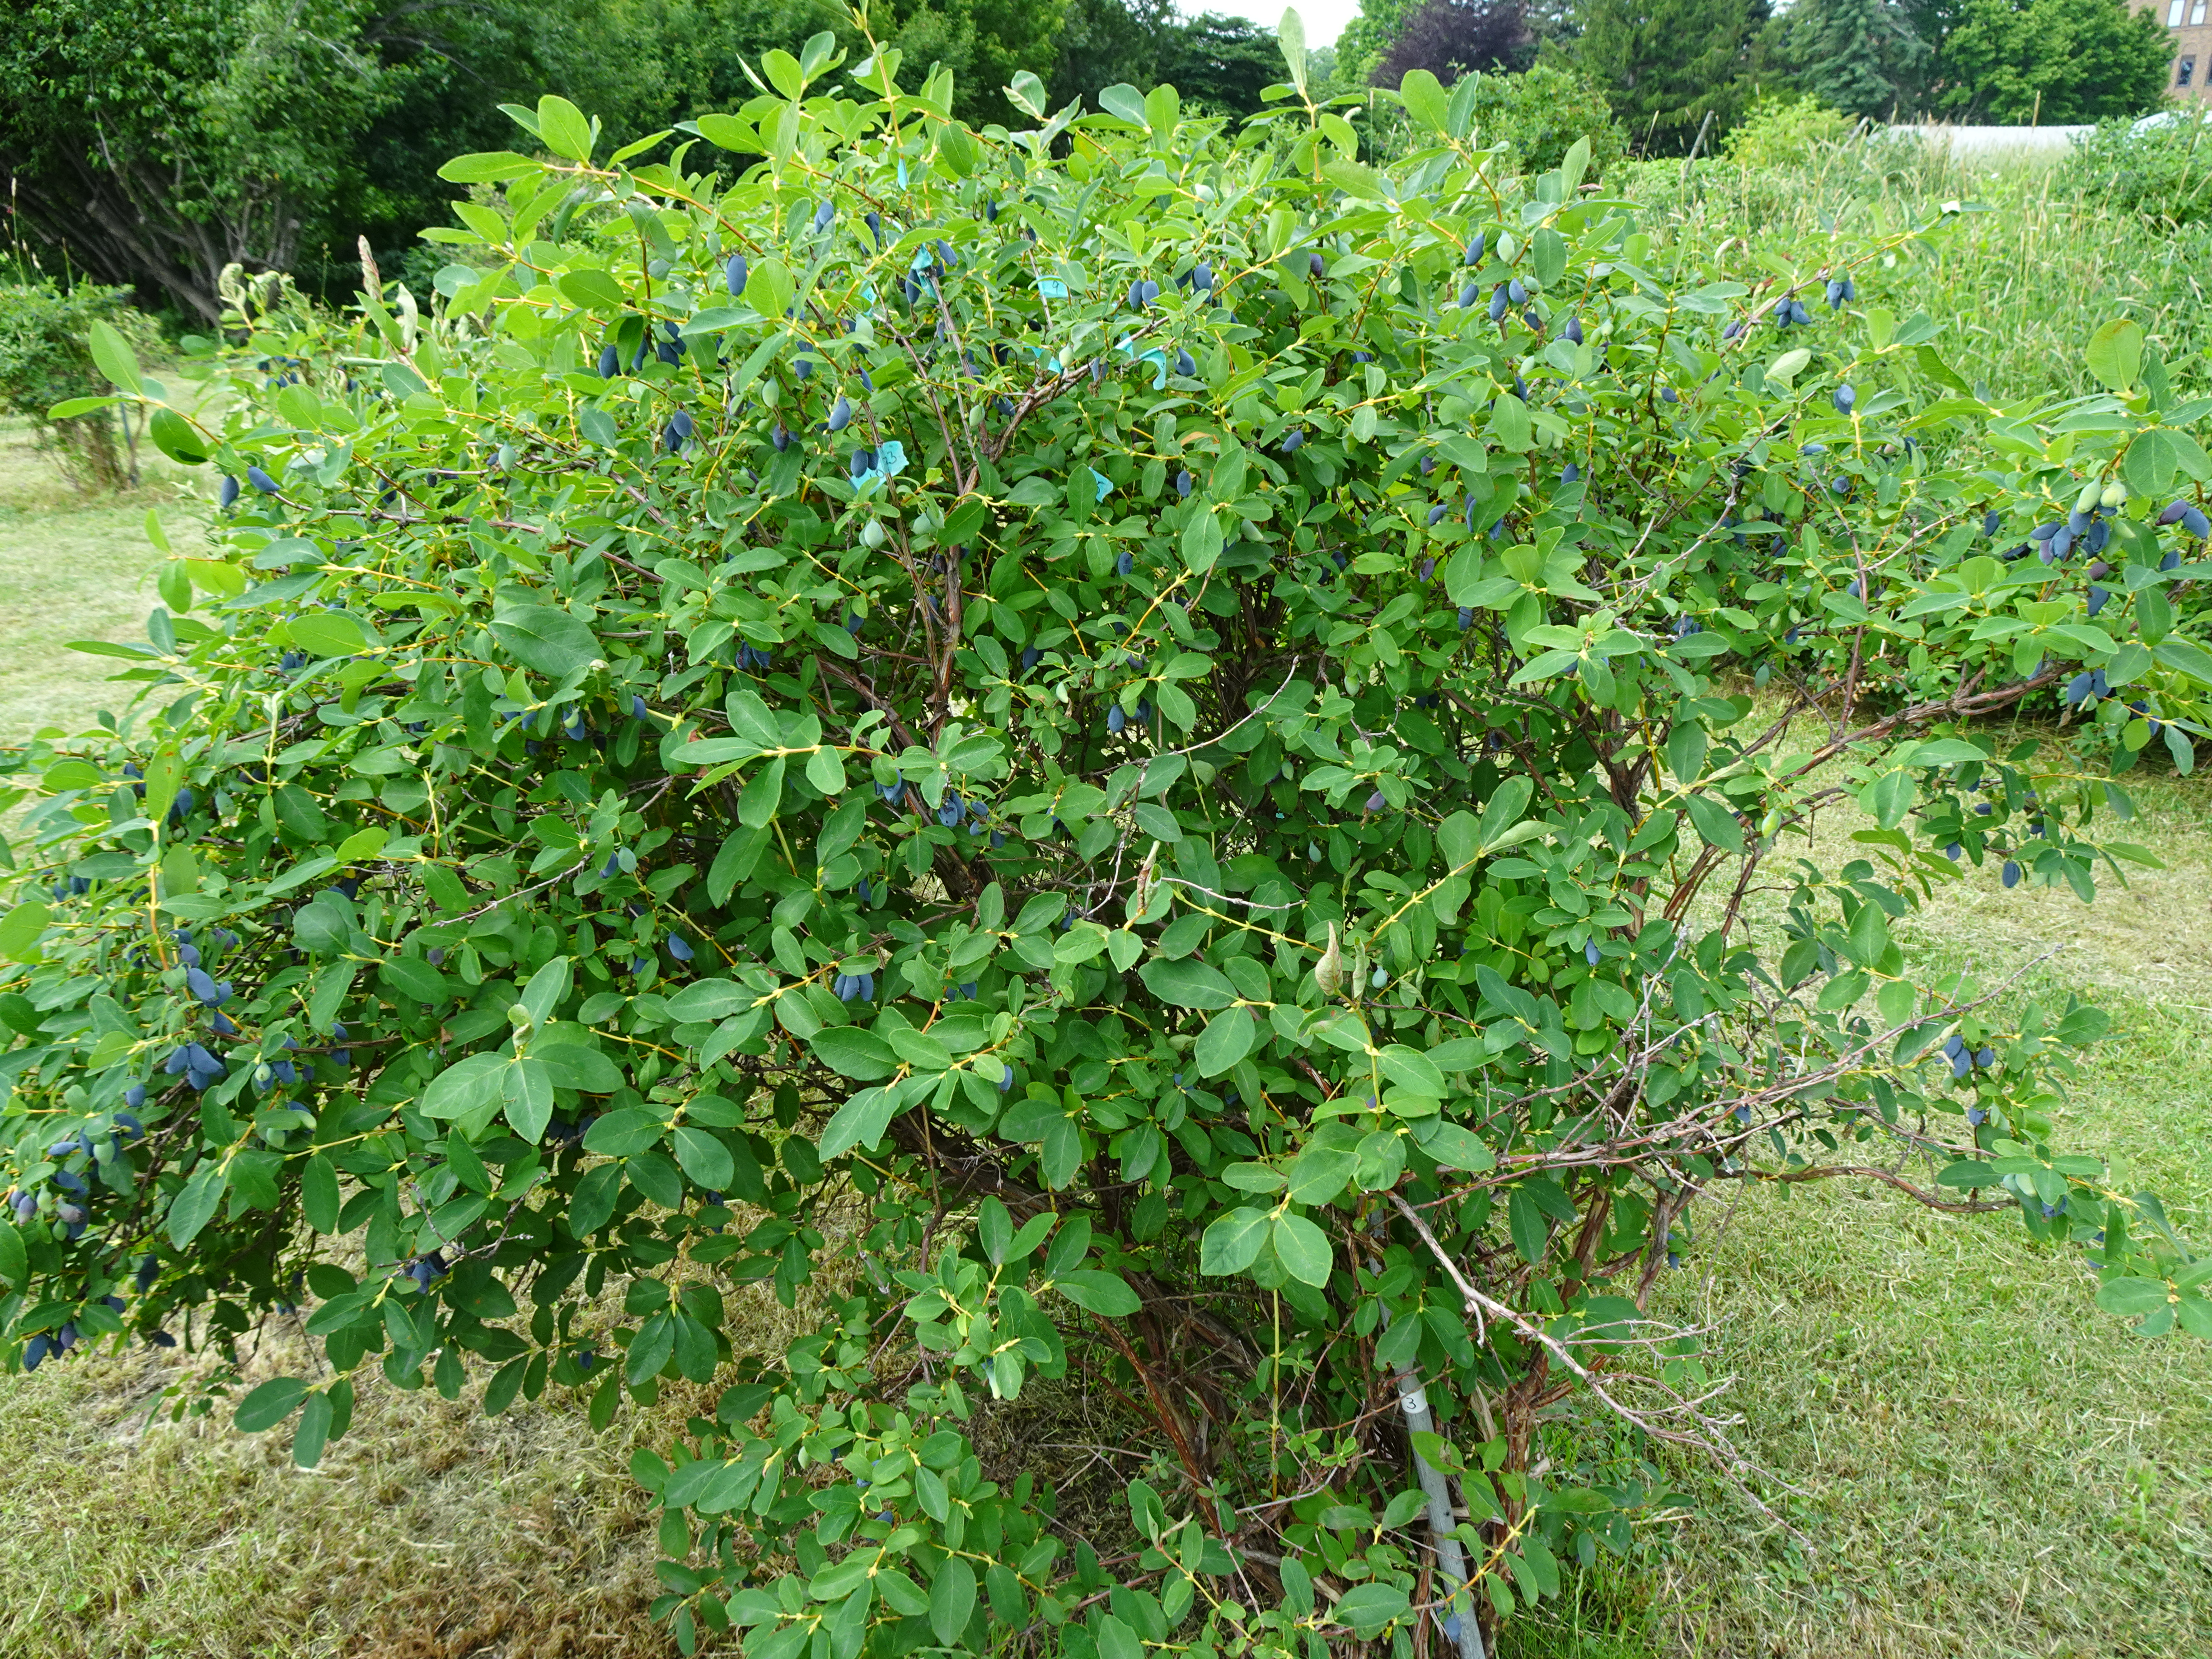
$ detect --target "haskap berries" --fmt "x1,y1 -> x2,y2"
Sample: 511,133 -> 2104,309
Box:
1366,1092 -> 1380,1109
881,768 -> 902,803
936,322 -> 946,343
1560,461 -> 1579,485
266,378 -> 273,390
1601,657 -> 1609,666
1665,1233 -> 1676,1242
2143,705 -> 2161,736
1128,707 -> 1141,719
1128,278 -> 1143,312
1345,674 -> 1360,697
2158,549 -> 2181,572
786,306 -> 805,320
1837,274 -> 1857,304
36,1181 -> 54,1212
1802,443 -> 1827,453
280,650 -> 294,671
842,972 -> 860,1004
1778,310 -> 1791,328
16,1195 -> 37,1225
1521,355 -> 1536,377
563,1122 -> 578,1144
1683,630 -> 1692,636
1467,492 -> 1476,508
1467,498 -> 1480,534
54,882 -> 67,904
175,788 -> 195,817
330,1041 -> 351,1066
617,847 -> 638,874
1825,277 -> 1847,309
860,367 -> 873,394
1639,656 -> 1646,669
1763,509 -> 1771,522
1219,299 -> 1239,324
125,1078 -> 147,1107
338,365 -> 346,372
1335,236 -> 1353,258
330,1022 -> 350,1040
1950,1047 -> 1971,1077
1735,325 -> 1743,337
2087,669 -> 2111,704
578,1114 -> 593,1141
1173,346 -> 1196,377
246,466 -> 282,492
1139,696 -> 1152,724
711,1192 -> 724,1207
1428,689 -> 1440,709
839,318 -> 868,354
42,869 -> 54,874
946,986 -> 958,1002
796,339 -> 813,355
1141,281 -> 1160,308
2023,791 -> 2038,812
1734,1100 -> 1754,1126
1225,1091 -> 1240,1103
1944,843 -> 1962,862
1365,790 -> 1386,812
1175,268 -> 1192,289
209,1011 -> 234,1037
657,339 -> 679,374
2085,515 -> 2110,553
1420,555 -> 1436,582
410,1260 -> 433,1291
562,708 -> 585,741
673,404 -> 697,437
280,1036 -> 300,1049
134,1255 -> 161,1291
856,968 -> 885,1003
70,875 -> 81,896
861,244 -> 869,257
258,361 -> 270,375
950,790 -> 965,822
964,349 -> 975,363
107,1296 -> 127,1314
748,401 -> 757,411
79,1125 -> 94,1156
1790,301 -> 1811,323
2030,813 -> 2042,833
2028,658 -> 2043,680
1309,253 -> 1322,277
1022,645 -> 1039,670
2001,862 -> 2020,889
1691,623 -> 1701,634
631,337 -> 650,370
167,803 -> 182,826
851,450 -> 867,477
1046,800 -> 1058,823
1976,1045 -> 1994,1068
2031,517 -> 2061,538
991,829 -> 1004,849
599,852 -> 621,878
906,268 -> 920,306
1193,184 -> 1215,202
797,1445 -> 810,1470
277,356 -> 301,368
186,1041 -> 222,1072
500,695 -> 518,722
2047,522 -> 2076,562
828,1447 -> 840,1463
829,395 -> 850,431
1674,613 -> 1693,632
278,375 -> 287,388
965,364 -> 982,383
935,238 -> 958,266
1174,1074 -> 1194,1090
1440,1612 -> 1462,1641
1735,463 -> 1746,476
665,933 -> 695,964
291,372 -> 298,383
1559,660 -> 1578,673
486,452 -> 499,466
860,517 -> 889,551
379,477 -> 396,504
1351,353 -> 1358,365
816,408 -> 829,431
2064,496 -> 2098,533
665,320 -> 687,354
2077,473 -> 2099,513
2099,473 -> 2130,509
995,394 -> 1016,416
2064,670 -> 2096,708
427,473 -> 438,488
350,655 -> 364,663
528,740 -> 541,755
1832,475 -> 1851,493
959,547 -> 970,560
1487,283 -> 1511,322
856,1460 -> 884,1489
970,799 -> 991,815
2088,1259 -> 2103,1269
186,1065 -> 210,1090
1192,269 -> 1213,302
363,393 -> 373,406
426,1256 -> 448,1277
1630,440 -> 1646,455
1721,516 -> 1734,528
294,652 -> 307,667
344,379 -> 358,393
598,345 -> 620,379
1282,429 -> 1303,453
794,355 -> 813,380
1417,451 -> 1438,478
1903,435 -> 1916,452
10,1188 -> 26,1209
755,640 -> 777,669
1331,551 -> 1346,568
287,611 -> 298,623
548,1117 -> 565,1141
126,942 -> 144,967
864,210 -> 879,249
520,693 -> 538,732
1357,345 -> 1374,363
498,444 -> 517,474
1968,1104 -> 1985,1127
927,595 -> 939,620
286,1099 -> 310,1115
229,778 -> 252,793
1591,327 -> 1602,348
815,212 -> 824,235
1489,731 -> 1505,752
272,1059 -> 298,1084
1982,510 -> 2007,538
582,1350 -> 593,1370
1415,696 -> 1427,712
221,927 -> 240,945
80,875 -> 91,893
934,554 -> 948,573
56,1198 -> 83,1223
908,506 -> 939,538
137,772 -> 146,791
219,474 -> 241,509
2159,497 -> 2190,524
170,930 -> 192,942
2038,539 -> 2054,567
2002,543 -> 2025,561
1062,909 -> 1078,930
238,770 -> 263,782
631,695 -> 647,720
1518,483 -> 1534,505
373,394 -> 381,402
959,980 -> 976,1001
1632,383 -> 1642,396
1105,702 -> 1130,737
110,1113 -> 148,1140
49,1139 -> 80,1156
864,447 -> 879,470
1126,651 -> 1144,669
1933,1034 -> 1965,1064
164,1043 -> 192,1074
711,1225 -> 722,1233
207,981 -> 232,1009
724,254 -> 747,296
214,928 -> 235,951
1773,298 -> 1790,315
1875,585 -> 1884,600
2043,1193 -> 2068,1217
859,876 -> 873,901
1761,809 -> 1784,840
1735,533 -> 1746,546
894,778 -> 909,806
2090,1232 -> 2105,1243
996,1065 -> 1014,1090
875,781 -> 883,797
1091,357 -> 1108,382
426,948 -> 445,966
179,944 -> 202,967
2087,560 -> 2110,581
1661,388 -> 1680,402
343,876 -> 359,898
773,425 -> 790,452
123,763 -> 139,779
1584,933 -> 1605,966
938,799 -> 958,828
302,1065 -> 315,1080
1371,964 -> 1388,988
1668,1252 -> 1679,1270
50,1334 -> 65,1359
1525,312 -> 1542,332
790,427 -> 802,442
441,469 -> 459,481
1514,376 -> 1526,404
1507,277 -> 1534,305
279,1303 -> 288,1316
934,257 -> 945,276
1848,580 -> 1859,597
1833,390 -> 1852,414
287,1303 -> 295,1315
186,968 -> 223,1004
662,422 -> 684,450
2041,828 -> 2046,839
258,1075 -> 273,1091
1838,385 -> 1857,405
874,1509 -> 895,1529
368,654 -> 377,661
1111,622 -> 1125,636
1178,470 -> 1192,497
1488,518 -> 1504,542
459,449 -> 471,472
986,198 -> 998,221
1975,803 -> 1992,815
2178,504 -> 2210,540
1026,228 -> 1036,244
818,202 -> 834,226
214,781 -> 236,815
1753,664 -> 1770,687
409,722 -> 423,747
2086,585 -> 2113,618
1203,258 -> 1212,268
2131,701 -> 2146,720
713,337 -> 727,366
21,1334 -> 51,1373
1968,778 -> 1980,793
154,1330 -> 178,1349
326,886 -> 349,902
1601,319 -> 1613,337
970,816 -> 989,835
1456,605 -> 1477,632
1319,567 -> 1331,584
1195,264 -> 1212,289
110,1137 -> 122,1162
61,1322 -> 77,1348
733,640 -> 755,671
1424,502 -> 1450,527
718,334 -> 731,364
70,1204 -> 89,1240
1222,538 -> 1233,556
255,1057 -> 271,1081
374,389 -> 383,400
844,610 -> 865,634
1463,232 -> 1486,267
1771,534 -> 1786,558
1458,280 -> 1483,309
1785,626 -> 1799,646
53,1219 -> 70,1242
1118,551 -> 1133,577
1497,230 -> 1517,263
1560,314 -> 1585,344
1721,319 -> 1738,339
